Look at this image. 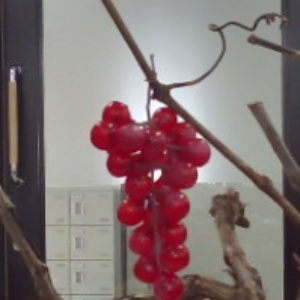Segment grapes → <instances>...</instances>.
<instances>
[{
	"label": "grapes",
	"instance_id": "01657485",
	"mask_svg": "<svg viewBox=\"0 0 300 300\" xmlns=\"http://www.w3.org/2000/svg\"><path fill=\"white\" fill-rule=\"evenodd\" d=\"M90 142L109 154L106 167L113 177H126L128 196L117 207V219L124 226L138 225L128 239L129 249L140 256L134 277L152 283L159 300H182L185 282L178 276L190 267L191 251L181 220L192 211L182 190L198 183L197 168L210 164L212 147L178 121L173 108H160L148 123H138L118 101L103 108Z\"/></svg>",
	"mask_w": 300,
	"mask_h": 300
}]
</instances>
